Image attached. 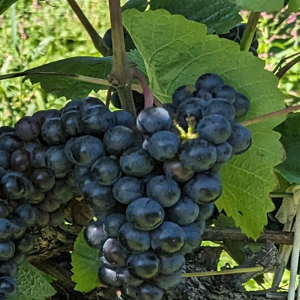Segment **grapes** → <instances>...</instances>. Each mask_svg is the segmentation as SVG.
Wrapping results in <instances>:
<instances>
[{
  "label": "grapes",
  "mask_w": 300,
  "mask_h": 300,
  "mask_svg": "<svg viewBox=\"0 0 300 300\" xmlns=\"http://www.w3.org/2000/svg\"><path fill=\"white\" fill-rule=\"evenodd\" d=\"M249 109L207 72L137 117L89 97L0 127V300L18 293L11 278L34 246L26 230L61 226L80 194L95 212L83 236L101 248L99 282L126 300L174 289L214 213L222 162L252 145L233 122Z\"/></svg>",
  "instance_id": "01657485"
}]
</instances>
